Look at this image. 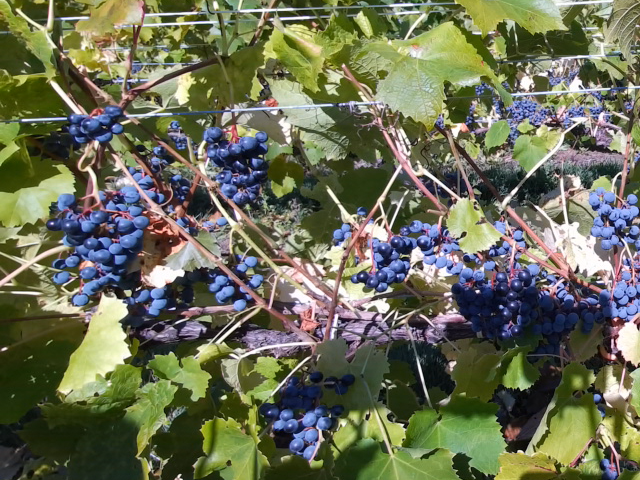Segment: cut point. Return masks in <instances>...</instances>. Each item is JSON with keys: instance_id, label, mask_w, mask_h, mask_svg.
Wrapping results in <instances>:
<instances>
[{"instance_id": "6a23745f", "label": "cut point", "mask_w": 640, "mask_h": 480, "mask_svg": "<svg viewBox=\"0 0 640 480\" xmlns=\"http://www.w3.org/2000/svg\"><path fill=\"white\" fill-rule=\"evenodd\" d=\"M87 175L93 179L92 193H96V189H99V181L96 178V174L93 171V166H87Z\"/></svg>"}, {"instance_id": "7d7e1d6f", "label": "cut point", "mask_w": 640, "mask_h": 480, "mask_svg": "<svg viewBox=\"0 0 640 480\" xmlns=\"http://www.w3.org/2000/svg\"><path fill=\"white\" fill-rule=\"evenodd\" d=\"M379 211L381 212V214H382V215H383V217H384V224H385V228H388L387 214H386V212L384 211V209L382 208V203H381V202H380V204H379Z\"/></svg>"}, {"instance_id": "deb38ca7", "label": "cut point", "mask_w": 640, "mask_h": 480, "mask_svg": "<svg viewBox=\"0 0 640 480\" xmlns=\"http://www.w3.org/2000/svg\"><path fill=\"white\" fill-rule=\"evenodd\" d=\"M622 175H624V172L617 173V174L614 176V178H613V180H612L611 188H614V187H615L616 180H617L620 176H622Z\"/></svg>"}]
</instances>
